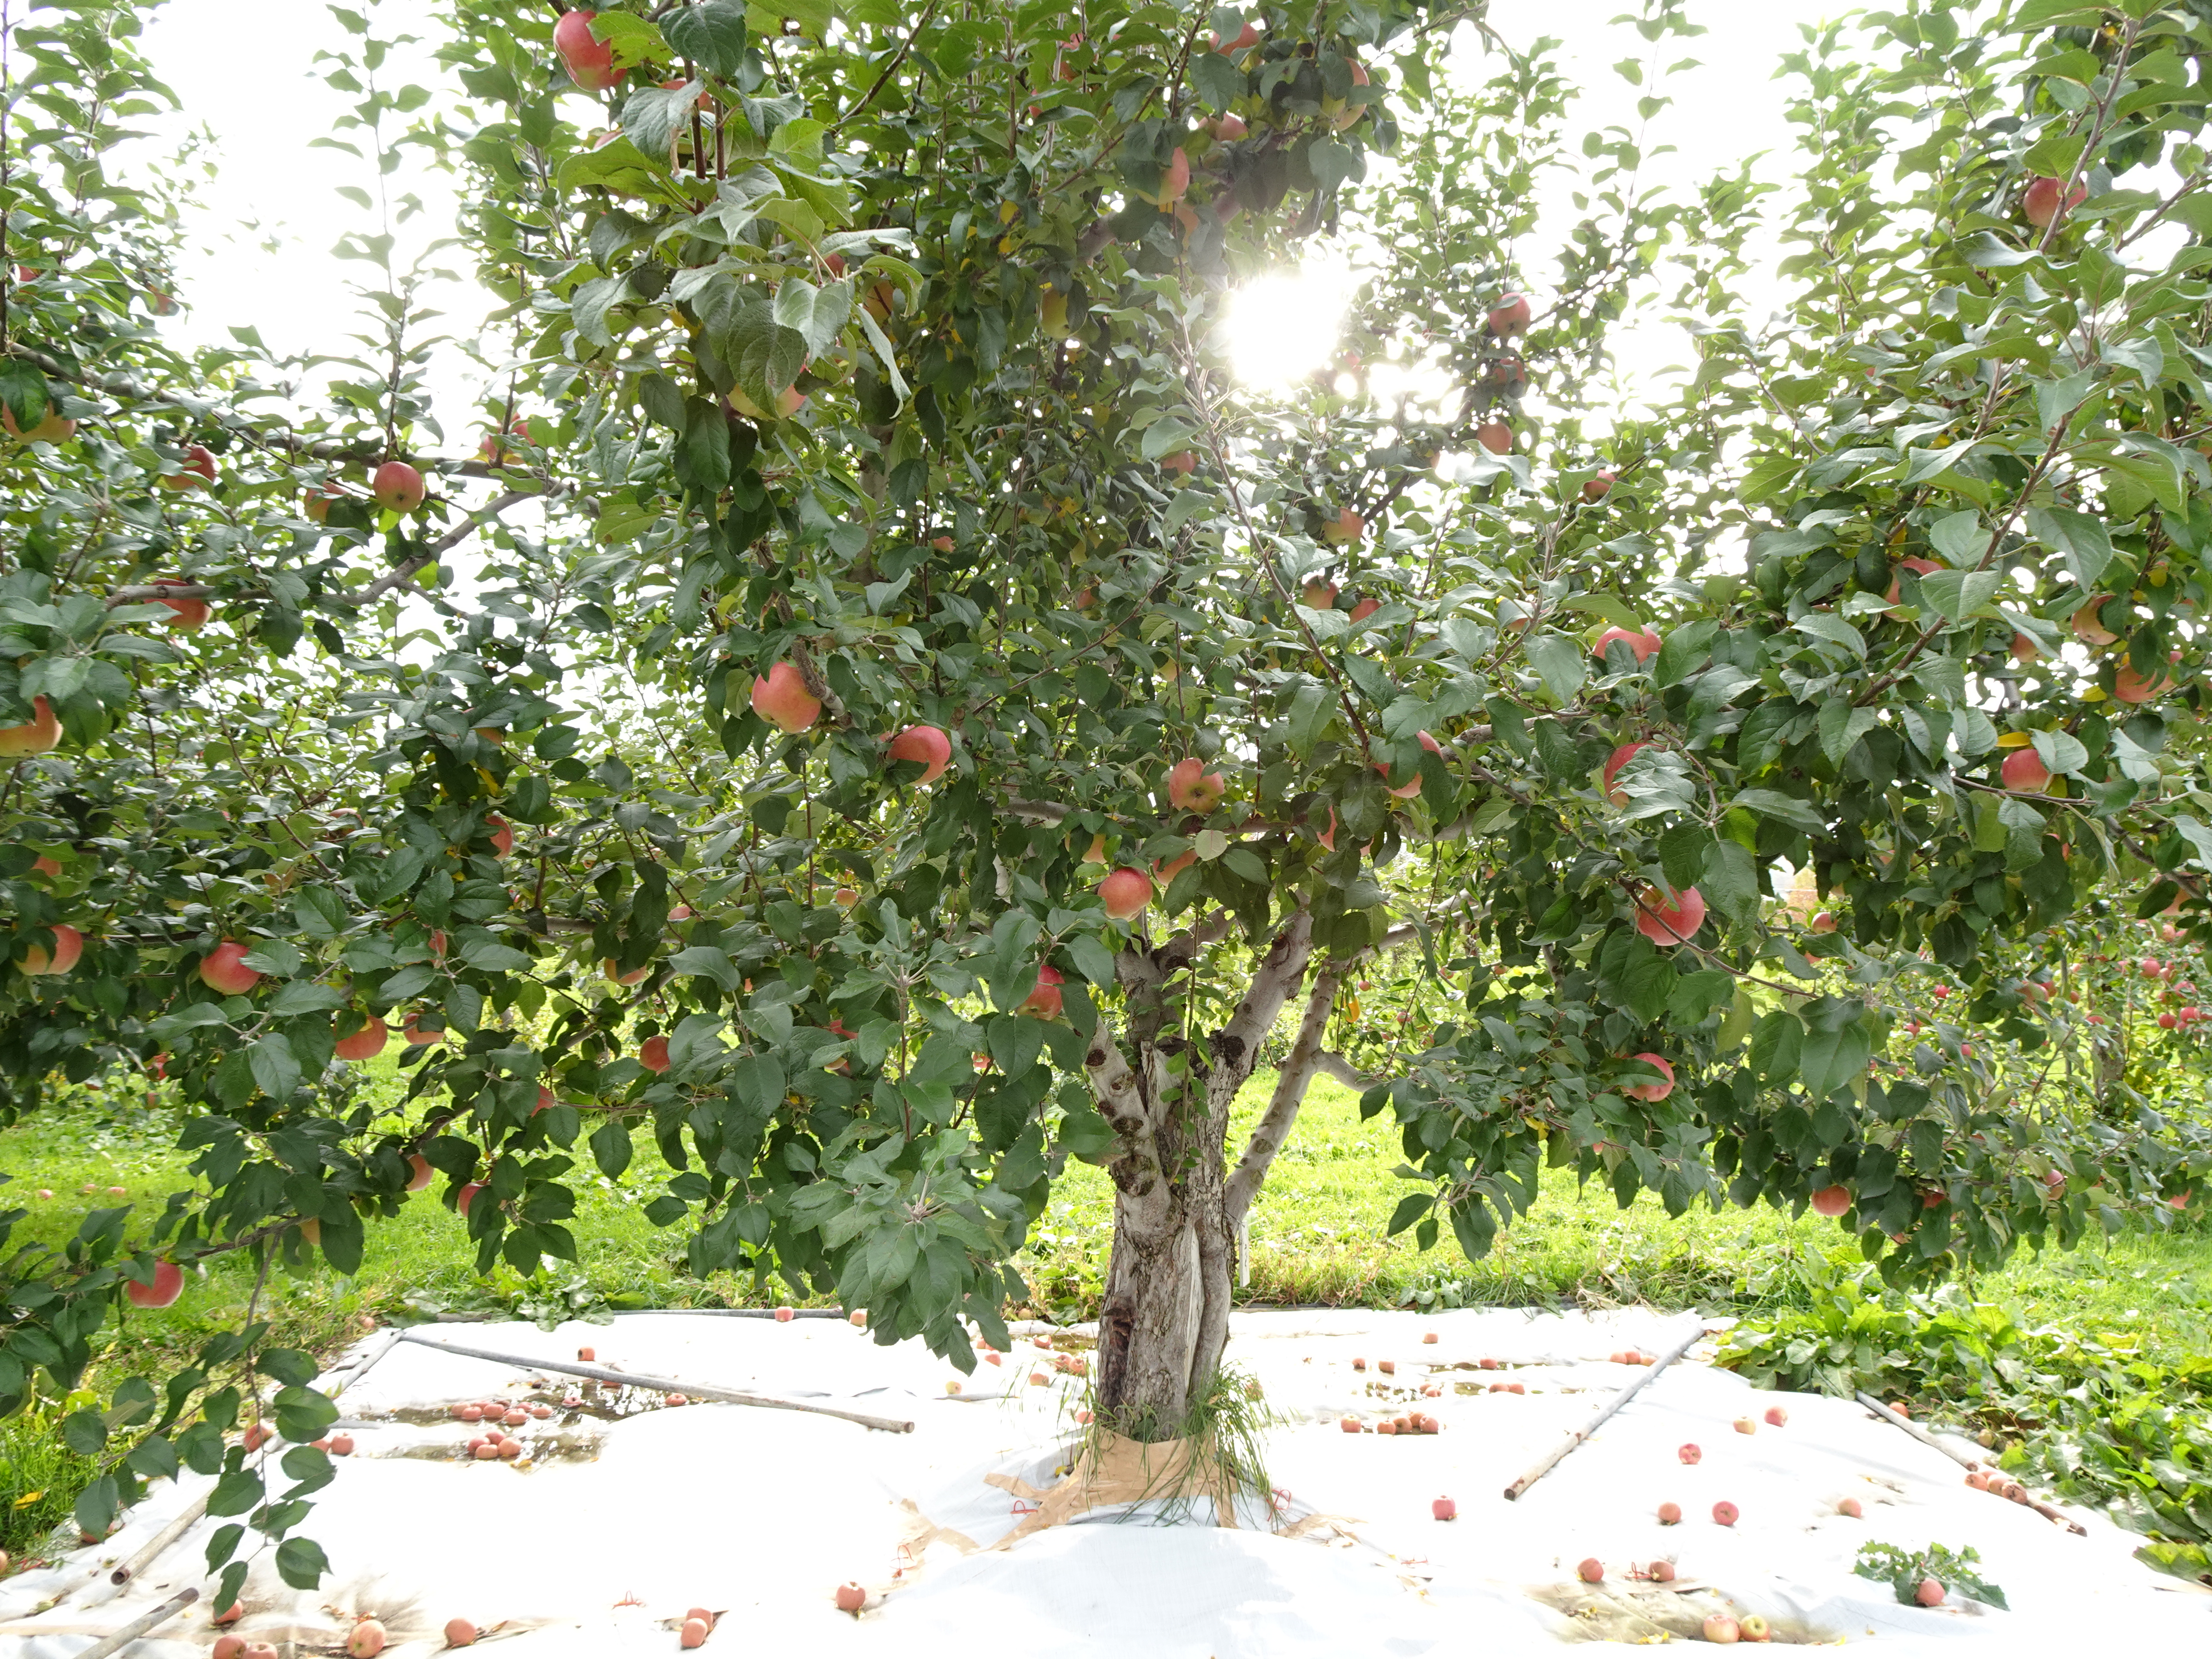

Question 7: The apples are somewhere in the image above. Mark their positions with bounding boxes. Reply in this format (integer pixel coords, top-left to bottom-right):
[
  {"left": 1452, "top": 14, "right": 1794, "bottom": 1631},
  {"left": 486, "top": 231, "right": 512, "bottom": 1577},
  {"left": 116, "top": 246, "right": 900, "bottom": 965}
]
[
  {"left": 2001, "top": 748, "right": 2051, "bottom": 792},
  {"left": 1811, "top": 912, "right": 1838, "bottom": 934},
  {"left": 836, "top": 889, "right": 858, "bottom": 906},
  {"left": 752, "top": 662, "right": 823, "bottom": 733},
  {"left": 878, "top": 729, "right": 892, "bottom": 742},
  {"left": 1372, "top": 730, "right": 1442, "bottom": 798},
  {"left": 1198, "top": 112, "right": 1248, "bottom": 142},
  {"left": 1315, "top": 806, "right": 1374, "bottom": 856},
  {"left": 144, "top": 578, "right": 212, "bottom": 632},
  {"left": 2060, "top": 493, "right": 2070, "bottom": 499},
  {"left": 1593, "top": 625, "right": 1663, "bottom": 665},
  {"left": 1028, "top": 90, "right": 1042, "bottom": 118},
  {"left": 1041, "top": 285, "right": 1087, "bottom": 338},
  {"left": 1153, "top": 849, "right": 1198, "bottom": 887},
  {"left": 1158, "top": 196, "right": 1200, "bottom": 241},
  {"left": 485, "top": 815, "right": 512, "bottom": 861},
  {"left": 403, "top": 1011, "right": 445, "bottom": 1045},
  {"left": 1507, "top": 616, "right": 1531, "bottom": 633},
  {"left": 1162, "top": 452, "right": 1196, "bottom": 476},
  {"left": 1883, "top": 559, "right": 1942, "bottom": 618},
  {"left": 2091, "top": 1180, "right": 2104, "bottom": 1189},
  {"left": 553, "top": 10, "right": 626, "bottom": 91},
  {"left": 3, "top": 398, "right": 76, "bottom": 446},
  {"left": 1069, "top": 32, "right": 1098, "bottom": 64},
  {"left": 458, "top": 1181, "right": 486, "bottom": 1218},
  {"left": 828, "top": 1019, "right": 861, "bottom": 1071},
  {"left": 1, "top": 695, "right": 63, "bottom": 758},
  {"left": 2044, "top": 1169, "right": 2065, "bottom": 1201},
  {"left": 2010, "top": 633, "right": 2044, "bottom": 664},
  {"left": 1169, "top": 757, "right": 1225, "bottom": 814},
  {"left": 1583, "top": 469, "right": 1616, "bottom": 502},
  {"left": 478, "top": 435, "right": 513, "bottom": 458},
  {"left": 1134, "top": 146, "right": 1189, "bottom": 205},
  {"left": 373, "top": 461, "right": 425, "bottom": 513},
  {"left": 2072, "top": 595, "right": 2119, "bottom": 646},
  {"left": 324, "top": 807, "right": 365, "bottom": 840},
  {"left": 1315, "top": 57, "right": 1369, "bottom": 130},
  {"left": 834, "top": 341, "right": 849, "bottom": 383},
  {"left": 2114, "top": 652, "right": 2180, "bottom": 703},
  {"left": 1078, "top": 588, "right": 1098, "bottom": 608},
  {"left": 461, "top": 707, "right": 503, "bottom": 745},
  {"left": 511, "top": 422, "right": 538, "bottom": 446},
  {"left": 1323, "top": 507, "right": 1365, "bottom": 546},
  {"left": 1879, "top": 850, "right": 1895, "bottom": 864},
  {"left": 422, "top": 924, "right": 447, "bottom": 967},
  {"left": 973, "top": 1053, "right": 991, "bottom": 1068},
  {"left": 1492, "top": 358, "right": 1526, "bottom": 384},
  {"left": 1923, "top": 1188, "right": 1946, "bottom": 1208},
  {"left": 2045, "top": 833, "right": 2069, "bottom": 860},
  {"left": 1098, "top": 867, "right": 1153, "bottom": 922},
  {"left": 1604, "top": 744, "right": 1665, "bottom": 809},
  {"left": 2169, "top": 1189, "right": 2191, "bottom": 1209},
  {"left": 668, "top": 905, "right": 691, "bottom": 919},
  {"left": 1805, "top": 950, "right": 1822, "bottom": 964},
  {"left": 863, "top": 282, "right": 893, "bottom": 324},
  {"left": 819, "top": 253, "right": 845, "bottom": 284},
  {"left": 888, "top": 725, "right": 951, "bottom": 787},
  {"left": 304, "top": 482, "right": 346, "bottom": 523},
  {"left": 1892, "top": 1232, "right": 1906, "bottom": 1244},
  {"left": 1113, "top": 34, "right": 1122, "bottom": 39},
  {"left": 128, "top": 1259, "right": 184, "bottom": 1308},
  {"left": 530, "top": 1085, "right": 554, "bottom": 1117},
  {"left": 1210, "top": 22, "right": 1265, "bottom": 68},
  {"left": 1303, "top": 575, "right": 1339, "bottom": 610},
  {"left": 1477, "top": 421, "right": 1512, "bottom": 455},
  {"left": 1593, "top": 1142, "right": 1603, "bottom": 1155},
  {"left": 200, "top": 942, "right": 261, "bottom": 995},
  {"left": 12, "top": 924, "right": 83, "bottom": 976},
  {"left": 405, "top": 1151, "right": 434, "bottom": 1191},
  {"left": 604, "top": 957, "right": 647, "bottom": 987},
  {"left": 1811, "top": 1184, "right": 1851, "bottom": 1217},
  {"left": 658, "top": 79, "right": 714, "bottom": 113},
  {"left": 332, "top": 1015, "right": 388, "bottom": 1061},
  {"left": 2154, "top": 872, "right": 2199, "bottom": 915},
  {"left": 1016, "top": 965, "right": 1064, "bottom": 1021},
  {"left": 1627, "top": 1053, "right": 1674, "bottom": 1102},
  {"left": 1489, "top": 292, "right": 1531, "bottom": 338},
  {"left": 1430, "top": 451, "right": 1440, "bottom": 469},
  {"left": 164, "top": 445, "right": 216, "bottom": 491},
  {"left": 744, "top": 978, "right": 753, "bottom": 993},
  {"left": 933, "top": 536, "right": 956, "bottom": 553},
  {"left": 30, "top": 856, "right": 61, "bottom": 877},
  {"left": 1349, "top": 598, "right": 1383, "bottom": 626},
  {"left": 2024, "top": 177, "right": 2087, "bottom": 228},
  {"left": 640, "top": 1035, "right": 671, "bottom": 1074},
  {"left": 2155, "top": 561, "right": 2193, "bottom": 605},
  {"left": 1062, "top": 42, "right": 1080, "bottom": 82},
  {"left": 1635, "top": 885, "right": 1705, "bottom": 946},
  {"left": 1065, "top": 833, "right": 1107, "bottom": 865},
  {"left": 726, "top": 352, "right": 810, "bottom": 420}
]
